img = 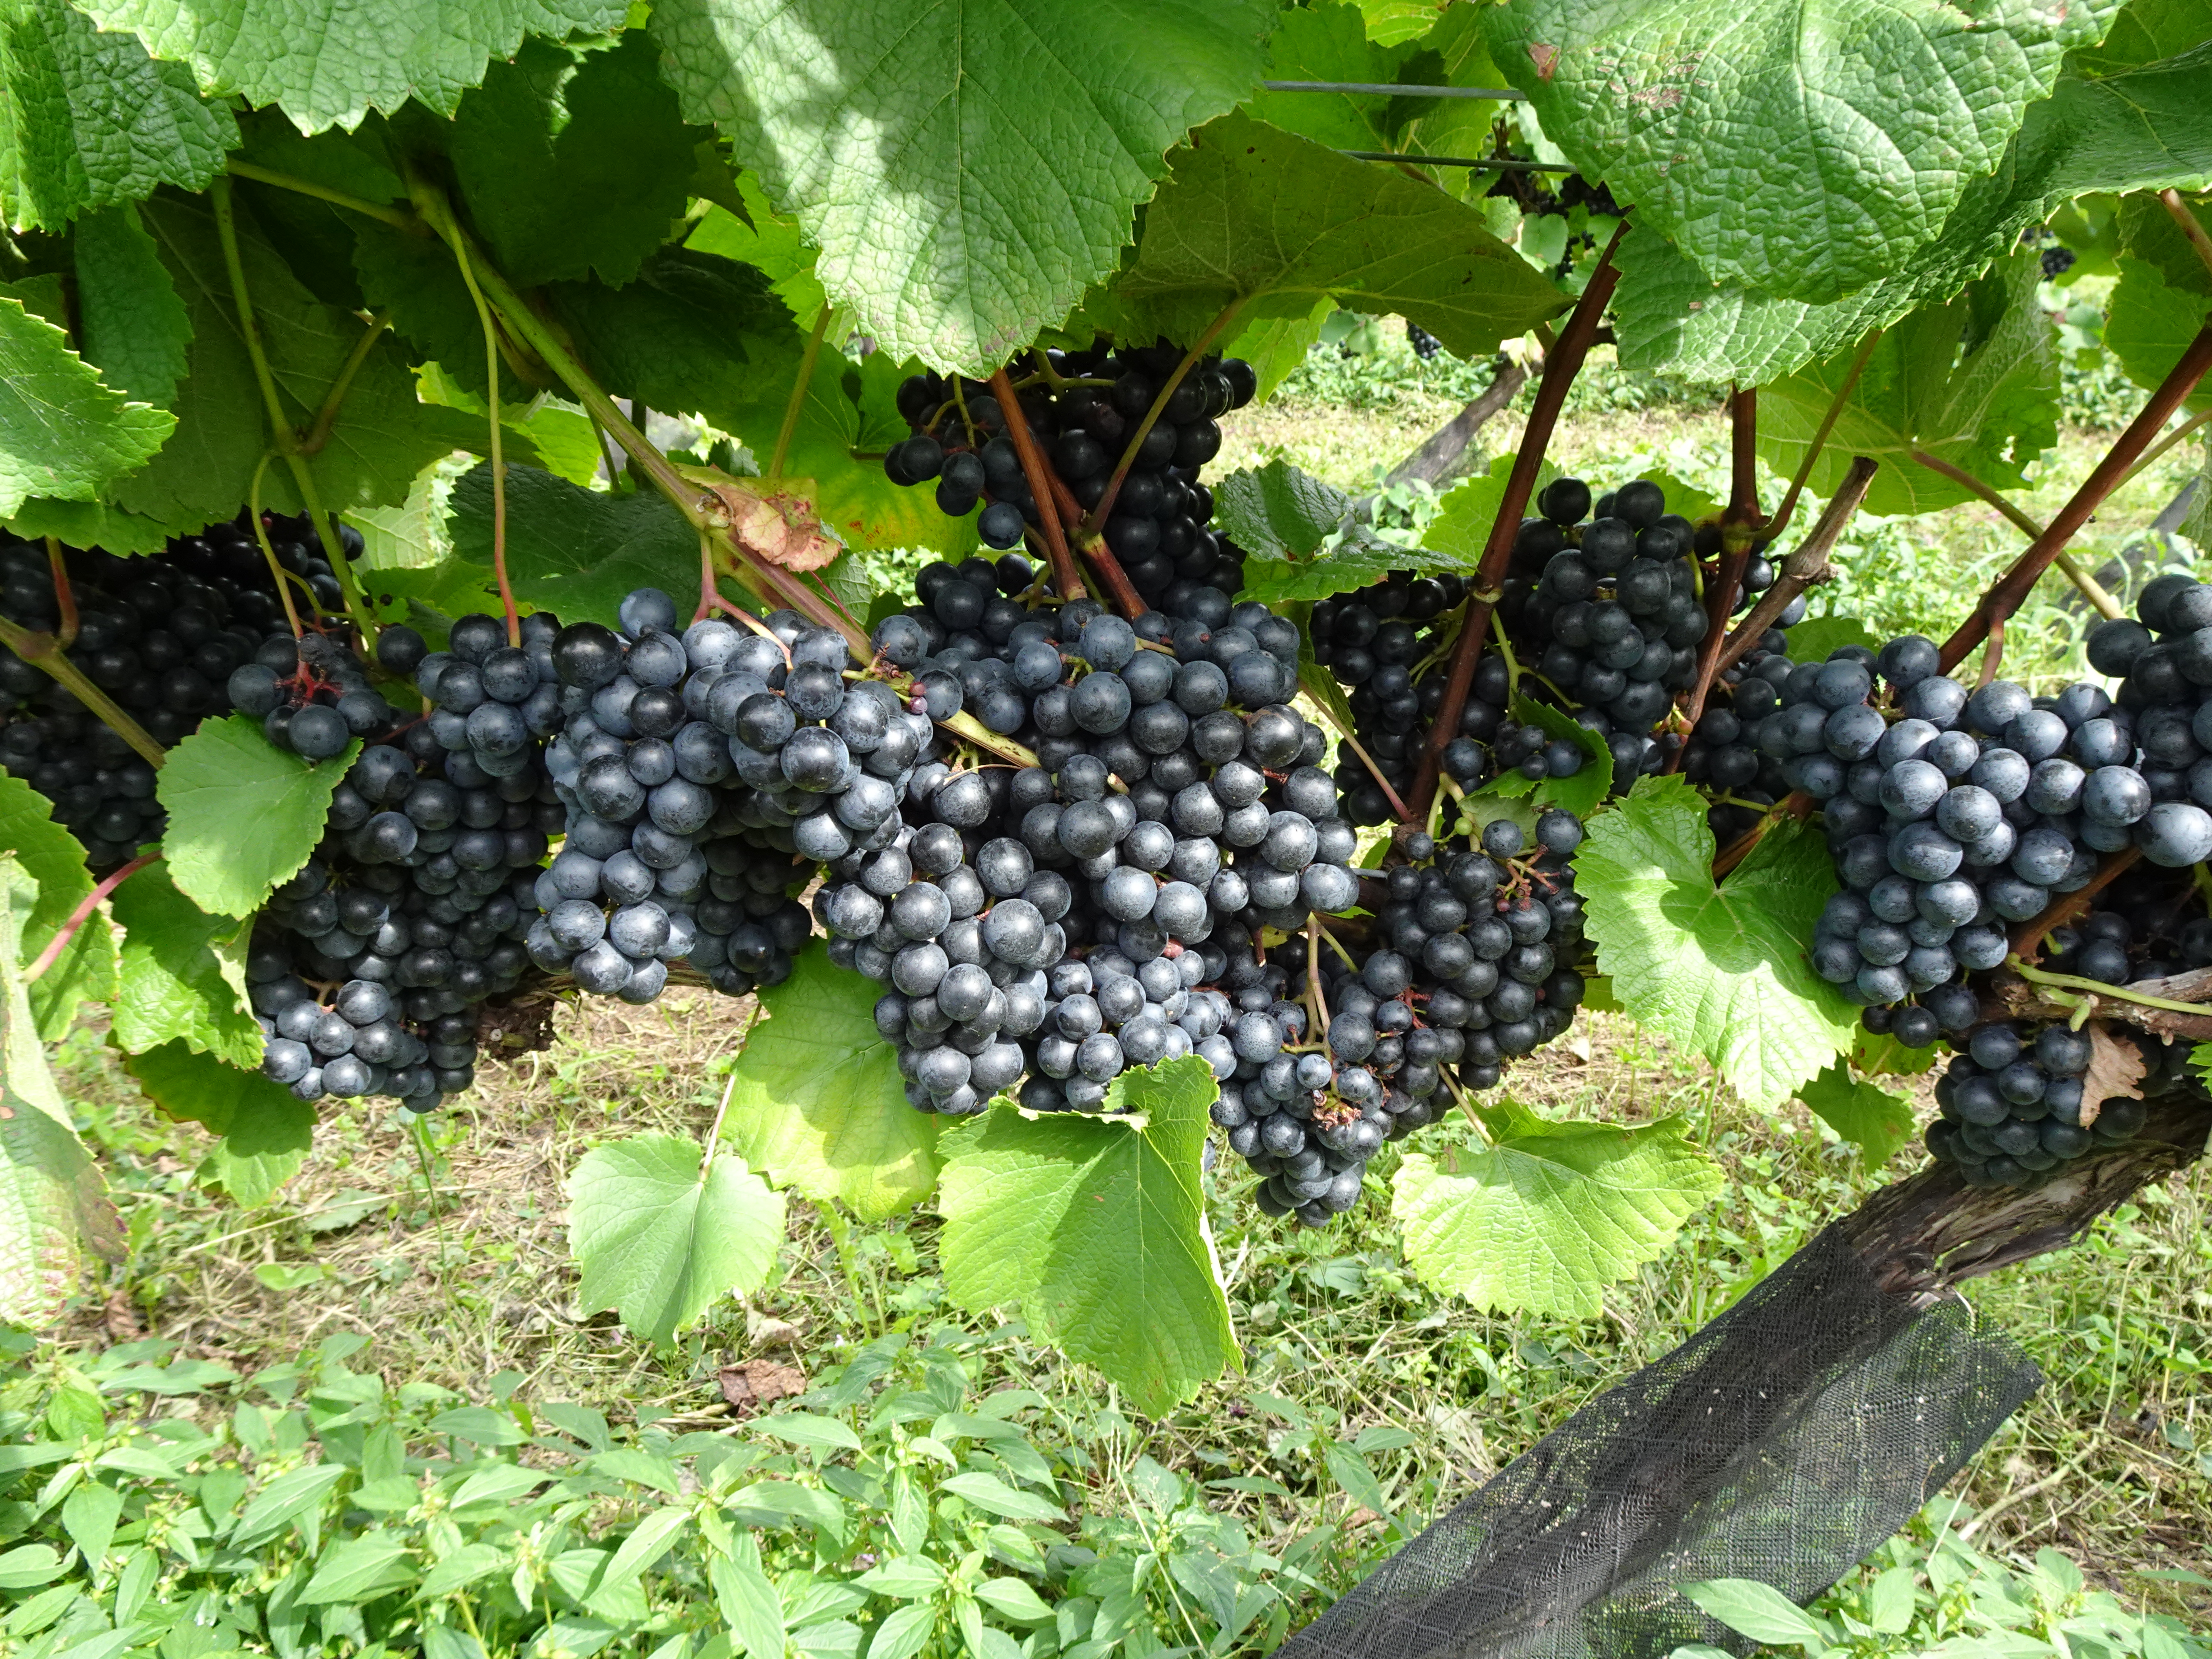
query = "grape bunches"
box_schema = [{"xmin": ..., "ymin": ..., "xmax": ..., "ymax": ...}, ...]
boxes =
[
  {"xmin": 1681, "ymin": 625, "xmax": 1795, "ymax": 857},
  {"xmin": 1863, "ymin": 891, "xmax": 2212, "ymax": 1189},
  {"xmin": 227, "ymin": 626, "xmax": 424, "ymax": 1099},
  {"xmin": 1506, "ymin": 475, "xmax": 1806, "ymax": 794},
  {"xmin": 1352, "ymin": 812, "xmax": 1596, "ymax": 1091},
  {"xmin": 812, "ymin": 759, "xmax": 1069, "ymax": 1117},
  {"xmin": 1760, "ymin": 635, "xmax": 2151, "ymax": 999},
  {"xmin": 709, "ymin": 610, "xmax": 964, "ymax": 861},
  {"xmin": 686, "ymin": 825, "xmax": 817, "ymax": 998},
  {"xmin": 861, "ymin": 556, "xmax": 1039, "ymax": 663},
  {"xmin": 1022, "ymin": 329, "xmax": 1256, "ymax": 620},
  {"xmin": 884, "ymin": 366, "xmax": 1046, "ymax": 560},
  {"xmin": 1309, "ymin": 568, "xmax": 1507, "ymax": 826},
  {"xmin": 1208, "ymin": 938, "xmax": 1459, "ymax": 1227},
  {"xmin": 1017, "ymin": 949, "xmax": 1237, "ymax": 1114},
  {"xmin": 524, "ymin": 586, "xmax": 742, "ymax": 1008},
  {"xmin": 964, "ymin": 590, "xmax": 1357, "ymax": 962},
  {"xmin": 2087, "ymin": 573, "xmax": 2212, "ymax": 868},
  {"xmin": 399, "ymin": 614, "xmax": 566, "ymax": 1116},
  {"xmin": 0, "ymin": 508, "xmax": 364, "ymax": 884}
]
